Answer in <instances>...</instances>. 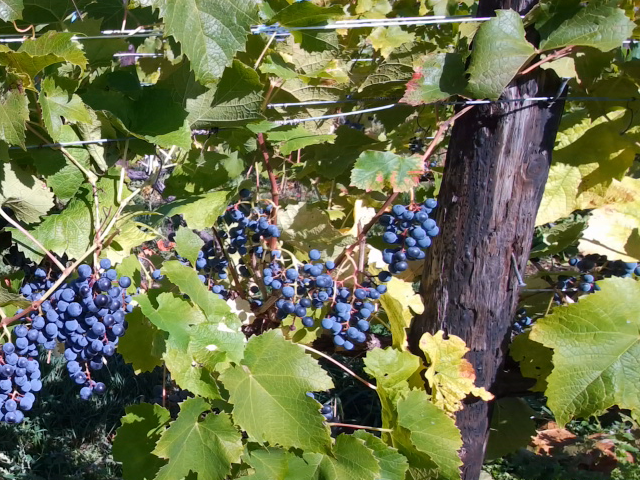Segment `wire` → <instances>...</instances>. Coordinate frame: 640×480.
I'll use <instances>...</instances> for the list:
<instances>
[{
    "label": "wire",
    "instance_id": "3",
    "mask_svg": "<svg viewBox=\"0 0 640 480\" xmlns=\"http://www.w3.org/2000/svg\"><path fill=\"white\" fill-rule=\"evenodd\" d=\"M399 104H400V101L396 100V101L388 102L386 104H380V105H376V106L357 109V110L352 111V112H334V113H331V114H318V115H314V116H303V117H300V118L294 119V120H280V121H276L275 125L276 126L296 125V124H300L302 122L316 121V120H320V119H333V118H336V117H354V116H357L359 114H364V113H367V112H373V111H378V110H382V109H388L390 107L398 106Z\"/></svg>",
    "mask_w": 640,
    "mask_h": 480
},
{
    "label": "wire",
    "instance_id": "4",
    "mask_svg": "<svg viewBox=\"0 0 640 480\" xmlns=\"http://www.w3.org/2000/svg\"><path fill=\"white\" fill-rule=\"evenodd\" d=\"M102 34H93V35H78L71 36V41H81V40H95V39H113L120 37H145V36H163L165 34L164 30H154L153 28H149L147 30H111V29H102Z\"/></svg>",
    "mask_w": 640,
    "mask_h": 480
},
{
    "label": "wire",
    "instance_id": "2",
    "mask_svg": "<svg viewBox=\"0 0 640 480\" xmlns=\"http://www.w3.org/2000/svg\"><path fill=\"white\" fill-rule=\"evenodd\" d=\"M530 100H556V101H595V96H558V95H528L522 97H500L491 100H467V99H447V104L465 105H493L503 102H524Z\"/></svg>",
    "mask_w": 640,
    "mask_h": 480
},
{
    "label": "wire",
    "instance_id": "5",
    "mask_svg": "<svg viewBox=\"0 0 640 480\" xmlns=\"http://www.w3.org/2000/svg\"><path fill=\"white\" fill-rule=\"evenodd\" d=\"M134 140H135V136L134 135L122 136V137H114V138H111V139H66V140H61V141L46 142V143H39V144H27L26 148L27 149H41V148H48V147L63 146V145H68V144H103V145H109V144H113V143H116V142L134 141Z\"/></svg>",
    "mask_w": 640,
    "mask_h": 480
},
{
    "label": "wire",
    "instance_id": "8",
    "mask_svg": "<svg viewBox=\"0 0 640 480\" xmlns=\"http://www.w3.org/2000/svg\"><path fill=\"white\" fill-rule=\"evenodd\" d=\"M244 126L243 125H222V126H215L212 128H209L207 130H200V129H195L192 128L191 132L193 134H198V135H210L214 132L217 131H225V130H243Z\"/></svg>",
    "mask_w": 640,
    "mask_h": 480
},
{
    "label": "wire",
    "instance_id": "6",
    "mask_svg": "<svg viewBox=\"0 0 640 480\" xmlns=\"http://www.w3.org/2000/svg\"><path fill=\"white\" fill-rule=\"evenodd\" d=\"M350 97L322 100V101H280L270 102V107H282V106H325L331 104L350 102Z\"/></svg>",
    "mask_w": 640,
    "mask_h": 480
},
{
    "label": "wire",
    "instance_id": "1",
    "mask_svg": "<svg viewBox=\"0 0 640 480\" xmlns=\"http://www.w3.org/2000/svg\"><path fill=\"white\" fill-rule=\"evenodd\" d=\"M490 19V15L467 14H460L455 16H446L445 14H441L440 17L389 15L336 19L335 23L339 25H319L318 23L280 25L279 22H276L271 24H250L249 28L253 33H263L277 30H299L303 28H305L306 30H341L348 28H380L390 26L416 27L419 25L427 24L463 23L474 21H488Z\"/></svg>",
    "mask_w": 640,
    "mask_h": 480
},
{
    "label": "wire",
    "instance_id": "7",
    "mask_svg": "<svg viewBox=\"0 0 640 480\" xmlns=\"http://www.w3.org/2000/svg\"><path fill=\"white\" fill-rule=\"evenodd\" d=\"M40 36H41L40 32L22 33V34L0 32V37H4V38H0V43H6V42L26 43L27 42L26 38H38Z\"/></svg>",
    "mask_w": 640,
    "mask_h": 480
}]
</instances>
